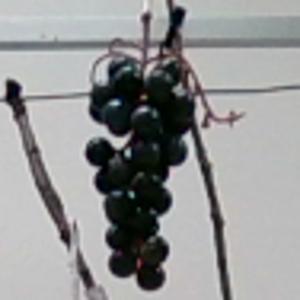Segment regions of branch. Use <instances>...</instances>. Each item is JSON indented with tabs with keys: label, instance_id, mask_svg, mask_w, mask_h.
Here are the masks:
<instances>
[{
	"label": "branch",
	"instance_id": "obj_2",
	"mask_svg": "<svg viewBox=\"0 0 300 300\" xmlns=\"http://www.w3.org/2000/svg\"><path fill=\"white\" fill-rule=\"evenodd\" d=\"M195 156L203 176L204 188L209 205L210 224L214 233V247L219 272L220 293L222 300H234L232 284L230 281V271L228 269V256L226 246V221L223 218L221 205L215 189L213 178V164L209 162L208 154L203 145L201 132L199 131L198 121L196 128L191 132Z\"/></svg>",
	"mask_w": 300,
	"mask_h": 300
},
{
	"label": "branch",
	"instance_id": "obj_1",
	"mask_svg": "<svg viewBox=\"0 0 300 300\" xmlns=\"http://www.w3.org/2000/svg\"><path fill=\"white\" fill-rule=\"evenodd\" d=\"M4 101L7 108L12 112V121L20 131L22 161L31 181L35 197L47 211L59 241L70 257L79 288L88 300H99V298L101 300H111L108 292L95 280L87 257L73 235L71 224L64 212V205L43 160L37 138L31 129L26 101L22 94V86L13 76L6 78Z\"/></svg>",
	"mask_w": 300,
	"mask_h": 300
},
{
	"label": "branch",
	"instance_id": "obj_3",
	"mask_svg": "<svg viewBox=\"0 0 300 300\" xmlns=\"http://www.w3.org/2000/svg\"><path fill=\"white\" fill-rule=\"evenodd\" d=\"M166 15L168 19V31L162 42V51L167 55H172L176 60H181L186 71L185 81L182 87L188 88V68L183 58V34L181 28L187 20L186 7L184 5L175 6V0H166Z\"/></svg>",
	"mask_w": 300,
	"mask_h": 300
}]
</instances>
